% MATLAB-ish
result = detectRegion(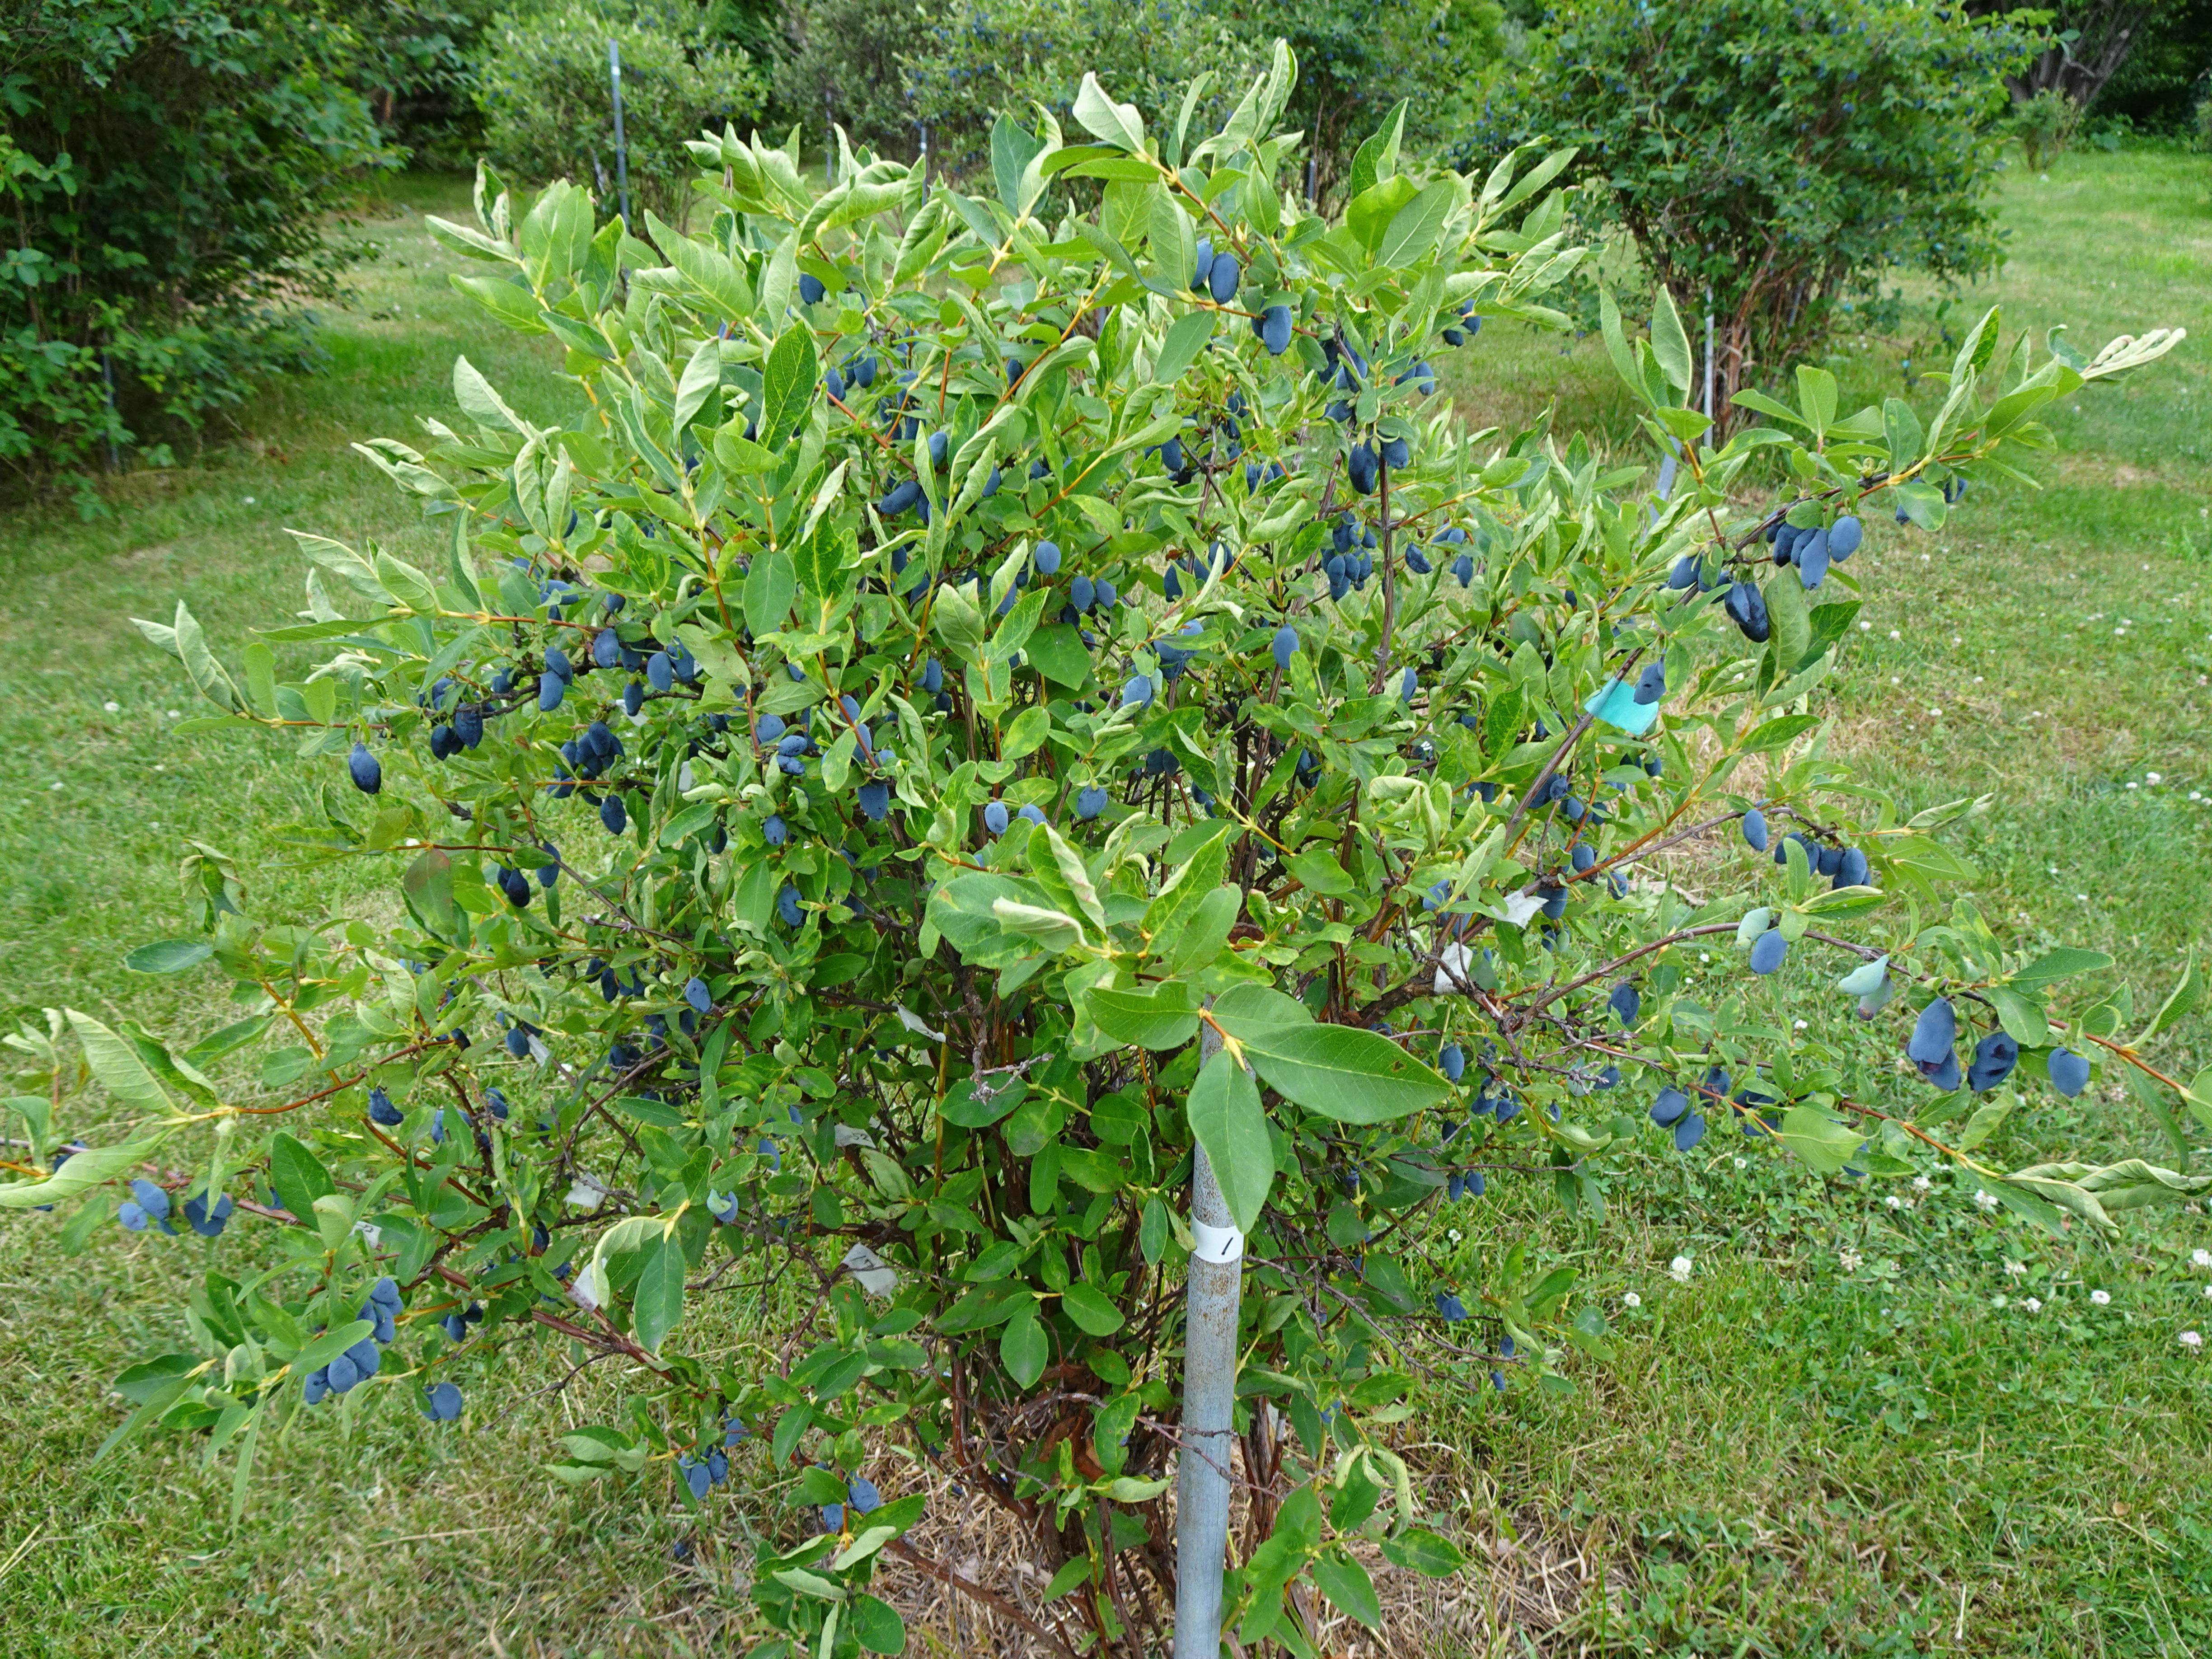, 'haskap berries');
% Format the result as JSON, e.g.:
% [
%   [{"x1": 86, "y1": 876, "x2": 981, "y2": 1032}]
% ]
[
  {"x1": 644, "y1": 1013, "x2": 664, "y2": 1026},
  {"x1": 1467, "y1": 780, "x2": 1499, "y2": 805},
  {"x1": 450, "y1": 728, "x2": 464, "y2": 755},
  {"x1": 966, "y1": 568, "x2": 981, "y2": 588},
  {"x1": 895, "y1": 339, "x2": 910, "y2": 362},
  {"x1": 1405, "y1": 543, "x2": 1432, "y2": 575},
  {"x1": 1234, "y1": 386, "x2": 1249, "y2": 417},
  {"x1": 595, "y1": 508, "x2": 612, "y2": 529},
  {"x1": 534, "y1": 566, "x2": 576, "y2": 584},
  {"x1": 1973, "y1": 1032, "x2": 2021, "y2": 1093},
  {"x1": 884, "y1": 712, "x2": 898, "y2": 725},
  {"x1": 455, "y1": 1304, "x2": 484, "y2": 1321},
  {"x1": 450, "y1": 980, "x2": 458, "y2": 985},
  {"x1": 683, "y1": 1459, "x2": 712, "y2": 1499},
  {"x1": 1544, "y1": 1101, "x2": 1562, "y2": 1127},
  {"x1": 858, "y1": 773, "x2": 889, "y2": 821},
  {"x1": 1565, "y1": 587, "x2": 1578, "y2": 608},
  {"x1": 843, "y1": 895, "x2": 872, "y2": 925},
  {"x1": 1015, "y1": 803, "x2": 1045, "y2": 828},
  {"x1": 600, "y1": 734, "x2": 625, "y2": 769},
  {"x1": 993, "y1": 583, "x2": 1021, "y2": 623},
  {"x1": 854, "y1": 355, "x2": 878, "y2": 391},
  {"x1": 68, "y1": 1142, "x2": 87, "y2": 1151},
  {"x1": 1527, "y1": 770, "x2": 1557, "y2": 809},
  {"x1": 538, "y1": 1121, "x2": 552, "y2": 1140},
  {"x1": 1210, "y1": 252, "x2": 1241, "y2": 302},
  {"x1": 346, "y1": 1338, "x2": 381, "y2": 1375},
  {"x1": 1540, "y1": 885, "x2": 1568, "y2": 923},
  {"x1": 874, "y1": 749, "x2": 896, "y2": 768},
  {"x1": 1036, "y1": 541, "x2": 1060, "y2": 575},
  {"x1": 1263, "y1": 303, "x2": 1291, "y2": 354},
  {"x1": 1828, "y1": 1117, "x2": 1841, "y2": 1125},
  {"x1": 744, "y1": 624, "x2": 756, "y2": 643},
  {"x1": 1530, "y1": 721, "x2": 1550, "y2": 744},
  {"x1": 430, "y1": 1111, "x2": 474, "y2": 1130},
  {"x1": 1567, "y1": 794, "x2": 1584, "y2": 818},
  {"x1": 709, "y1": 1454, "x2": 729, "y2": 1486},
  {"x1": 897, "y1": 371, "x2": 917, "y2": 387},
  {"x1": 134, "y1": 1178, "x2": 171, "y2": 1216},
  {"x1": 1603, "y1": 780, "x2": 1617, "y2": 789},
  {"x1": 685, "y1": 455, "x2": 699, "y2": 478},
  {"x1": 814, "y1": 1463, "x2": 827, "y2": 1471},
  {"x1": 1857, "y1": 982, "x2": 1898, "y2": 1020},
  {"x1": 1449, "y1": 1172, "x2": 1466, "y2": 1203},
  {"x1": 648, "y1": 527, "x2": 657, "y2": 538},
  {"x1": 772, "y1": 753, "x2": 807, "y2": 776},
  {"x1": 599, "y1": 795, "x2": 629, "y2": 836},
  {"x1": 1592, "y1": 804, "x2": 1606, "y2": 825},
  {"x1": 1616, "y1": 782, "x2": 1625, "y2": 791},
  {"x1": 493, "y1": 1254, "x2": 519, "y2": 1272},
  {"x1": 1327, "y1": 554, "x2": 1347, "y2": 586},
  {"x1": 913, "y1": 666, "x2": 925, "y2": 689},
  {"x1": 1794, "y1": 1090, "x2": 1816, "y2": 1104},
  {"x1": 1908, "y1": 1001, "x2": 1953, "y2": 1064},
  {"x1": 1667, "y1": 553, "x2": 1699, "y2": 592},
  {"x1": 1633, "y1": 755, "x2": 1641, "y2": 768},
  {"x1": 1381, "y1": 435, "x2": 1410, "y2": 471},
  {"x1": 539, "y1": 593, "x2": 562, "y2": 623},
  {"x1": 644, "y1": 1091, "x2": 661, "y2": 1103},
  {"x1": 1330, "y1": 575, "x2": 1351, "y2": 602},
  {"x1": 416, "y1": 1388, "x2": 441, "y2": 1422},
  {"x1": 589, "y1": 720, "x2": 611, "y2": 760},
  {"x1": 889, "y1": 543, "x2": 916, "y2": 576},
  {"x1": 1608, "y1": 984, "x2": 1640, "y2": 1025},
  {"x1": 635, "y1": 518, "x2": 651, "y2": 537},
  {"x1": 374, "y1": 1302, "x2": 396, "y2": 1341},
  {"x1": 1458, "y1": 298, "x2": 1481, "y2": 336},
  {"x1": 1155, "y1": 639, "x2": 1193, "y2": 674},
  {"x1": 804, "y1": 705, "x2": 825, "y2": 752},
  {"x1": 1336, "y1": 366, "x2": 1348, "y2": 390},
  {"x1": 1128, "y1": 766, "x2": 1143, "y2": 783},
  {"x1": 451, "y1": 705, "x2": 486, "y2": 751},
  {"x1": 1551, "y1": 847, "x2": 1564, "y2": 864},
  {"x1": 1748, "y1": 927, "x2": 1784, "y2": 973},
  {"x1": 1188, "y1": 449, "x2": 1205, "y2": 470},
  {"x1": 477, "y1": 1131, "x2": 492, "y2": 1154},
  {"x1": 120, "y1": 1201, "x2": 148, "y2": 1232},
  {"x1": 439, "y1": 1314, "x2": 448, "y2": 1327},
  {"x1": 674, "y1": 1541, "x2": 689, "y2": 1555},
  {"x1": 617, "y1": 636, "x2": 652, "y2": 668},
  {"x1": 1247, "y1": 465, "x2": 1258, "y2": 496},
  {"x1": 1634, "y1": 660, "x2": 1665, "y2": 705},
  {"x1": 1196, "y1": 558, "x2": 1213, "y2": 582},
  {"x1": 524, "y1": 1016, "x2": 543, "y2": 1037},
  {"x1": 1257, "y1": 461, "x2": 1274, "y2": 485},
  {"x1": 1547, "y1": 774, "x2": 1570, "y2": 802},
  {"x1": 977, "y1": 466, "x2": 1002, "y2": 496},
  {"x1": 29, "y1": 1204, "x2": 53, "y2": 1211},
  {"x1": 355, "y1": 1367, "x2": 367, "y2": 1383},
  {"x1": 1552, "y1": 711, "x2": 1565, "y2": 726},
  {"x1": 1080, "y1": 787, "x2": 1106, "y2": 821},
  {"x1": 355, "y1": 1297, "x2": 376, "y2": 1327},
  {"x1": 574, "y1": 732, "x2": 592, "y2": 764},
  {"x1": 1766, "y1": 520, "x2": 1794, "y2": 562},
  {"x1": 1191, "y1": 780, "x2": 1211, "y2": 805},
  {"x1": 430, "y1": 723, "x2": 464, "y2": 761},
  {"x1": 262, "y1": 1188, "x2": 286, "y2": 1209},
  {"x1": 399, "y1": 958, "x2": 412, "y2": 972},
  {"x1": 1740, "y1": 805, "x2": 1770, "y2": 854},
  {"x1": 1342, "y1": 337, "x2": 1367, "y2": 392},
  {"x1": 665, "y1": 636, "x2": 696, "y2": 682},
  {"x1": 2048, "y1": 1045, "x2": 2091, "y2": 1101},
  {"x1": 1200, "y1": 441, "x2": 1214, "y2": 461},
  {"x1": 366, "y1": 1089, "x2": 404, "y2": 1127},
  {"x1": 1833, "y1": 846, "x2": 1870, "y2": 891},
  {"x1": 838, "y1": 849, "x2": 854, "y2": 869},
  {"x1": 1120, "y1": 674, "x2": 1155, "y2": 712},
  {"x1": 1415, "y1": 359, "x2": 1438, "y2": 398},
  {"x1": 414, "y1": 962, "x2": 428, "y2": 974},
  {"x1": 787, "y1": 1104, "x2": 805, "y2": 1126},
  {"x1": 385, "y1": 1298, "x2": 406, "y2": 1314},
  {"x1": 161, "y1": 1222, "x2": 181, "y2": 1236},
  {"x1": 1222, "y1": 546, "x2": 1234, "y2": 573},
  {"x1": 1226, "y1": 395, "x2": 1237, "y2": 414},
  {"x1": 1457, "y1": 712, "x2": 1479, "y2": 734},
  {"x1": 822, "y1": 749, "x2": 831, "y2": 768},
  {"x1": 878, "y1": 397, "x2": 895, "y2": 422},
  {"x1": 1436, "y1": 1292, "x2": 1468, "y2": 1323},
  {"x1": 546, "y1": 768, "x2": 596, "y2": 799},
  {"x1": 1445, "y1": 1043, "x2": 1466, "y2": 1083},
  {"x1": 487, "y1": 1099, "x2": 508, "y2": 1119},
  {"x1": 1331, "y1": 512, "x2": 1358, "y2": 554},
  {"x1": 1161, "y1": 438, "x2": 1190, "y2": 478},
  {"x1": 649, "y1": 1022, "x2": 668, "y2": 1050},
  {"x1": 1227, "y1": 442, "x2": 1236, "y2": 453},
  {"x1": 303, "y1": 1368, "x2": 331, "y2": 1406},
  {"x1": 744, "y1": 422, "x2": 756, "y2": 443},
  {"x1": 1363, "y1": 528, "x2": 1376, "y2": 549},
  {"x1": 1355, "y1": 580, "x2": 1365, "y2": 592},
  {"x1": 1595, "y1": 1067, "x2": 1619, "y2": 1089},
  {"x1": 487, "y1": 1261, "x2": 498, "y2": 1272},
  {"x1": 1350, "y1": 442, "x2": 1379, "y2": 496},
  {"x1": 714, "y1": 1190, "x2": 738, "y2": 1224},
  {"x1": 688, "y1": 585, "x2": 706, "y2": 598},
  {"x1": 539, "y1": 955, "x2": 559, "y2": 980},
  {"x1": 879, "y1": 481, "x2": 920, "y2": 516},
  {"x1": 833, "y1": 353, "x2": 863, "y2": 387},
  {"x1": 438, "y1": 1034, "x2": 450, "y2": 1042},
  {"x1": 1541, "y1": 927, "x2": 1563, "y2": 955},
  {"x1": 755, "y1": 714, "x2": 786, "y2": 743},
  {"x1": 862, "y1": 867, "x2": 877, "y2": 884},
  {"x1": 1072, "y1": 576, "x2": 1094, "y2": 614},
  {"x1": 1694, "y1": 554, "x2": 1726, "y2": 593},
  {"x1": 430, "y1": 1111, "x2": 448, "y2": 1144},
  {"x1": 505, "y1": 1026, "x2": 530, "y2": 1059},
  {"x1": 1321, "y1": 548, "x2": 1334, "y2": 573},
  {"x1": 1644, "y1": 757, "x2": 1662, "y2": 776},
  {"x1": 1315, "y1": 337, "x2": 1338, "y2": 384},
  {"x1": 1033, "y1": 313, "x2": 1043, "y2": 346},
  {"x1": 1612, "y1": 615, "x2": 1636, "y2": 639},
  {"x1": 563, "y1": 510, "x2": 578, "y2": 538},
  {"x1": 765, "y1": 814, "x2": 787, "y2": 846},
  {"x1": 707, "y1": 820, "x2": 728, "y2": 854},
  {"x1": 604, "y1": 593, "x2": 626, "y2": 613},
  {"x1": 1843, "y1": 1142, "x2": 1871, "y2": 1175},
  {"x1": 1395, "y1": 667, "x2": 1418, "y2": 706},
  {"x1": 848, "y1": 722, "x2": 874, "y2": 760},
  {"x1": 1438, "y1": 526, "x2": 1466, "y2": 547},
  {"x1": 369, "y1": 1275, "x2": 399, "y2": 1305},
  {"x1": 761, "y1": 1115, "x2": 788, "y2": 1140},
  {"x1": 1321, "y1": 1397, "x2": 1342, "y2": 1424},
  {"x1": 1812, "y1": 841, "x2": 1844, "y2": 882},
  {"x1": 583, "y1": 958, "x2": 603, "y2": 983},
  {"x1": 618, "y1": 679, "x2": 645, "y2": 718},
  {"x1": 1732, "y1": 1085, "x2": 1767, "y2": 1118},
  {"x1": 825, "y1": 374, "x2": 848, "y2": 408},
  {"x1": 1295, "y1": 750, "x2": 1321, "y2": 789},
  {"x1": 441, "y1": 990, "x2": 454, "y2": 1012},
  {"x1": 797, "y1": 272, "x2": 826, "y2": 306},
  {"x1": 717, "y1": 323, "x2": 747, "y2": 369},
  {"x1": 540, "y1": 1294, "x2": 558, "y2": 1303},
  {"x1": 623, "y1": 778, "x2": 642, "y2": 788},
  {"x1": 821, "y1": 1504, "x2": 846, "y2": 1531},
  {"x1": 185, "y1": 1198, "x2": 227, "y2": 1236},
  {"x1": 1619, "y1": 752, "x2": 1633, "y2": 766},
  {"x1": 707, "y1": 1189, "x2": 733, "y2": 1213},
  {"x1": 54, "y1": 1156, "x2": 73, "y2": 1170},
  {"x1": 538, "y1": 580, "x2": 578, "y2": 605},
  {"x1": 938, "y1": 693, "x2": 952, "y2": 712},
  {"x1": 848, "y1": 1475, "x2": 882, "y2": 1516},
  {"x1": 1441, "y1": 326, "x2": 1466, "y2": 348},
  {"x1": 985, "y1": 803, "x2": 1007, "y2": 835},
  {"x1": 1835, "y1": 958, "x2": 1889, "y2": 999},
  {"x1": 1465, "y1": 1167, "x2": 1485, "y2": 1203},
  {"x1": 193, "y1": 1190, "x2": 234, "y2": 1215},
  {"x1": 1272, "y1": 624, "x2": 1300, "y2": 671},
  {"x1": 608, "y1": 1042, "x2": 638, "y2": 1070},
  {"x1": 645, "y1": 651, "x2": 675, "y2": 693},
  {"x1": 1736, "y1": 907, "x2": 1770, "y2": 950},
  {"x1": 1573, "y1": 845, "x2": 1594, "y2": 873},
  {"x1": 722, "y1": 1418, "x2": 742, "y2": 1449},
  {"x1": 776, "y1": 885, "x2": 806, "y2": 930},
  {"x1": 496, "y1": 1011, "x2": 505, "y2": 1024},
  {"x1": 724, "y1": 680, "x2": 751, "y2": 722},
  {"x1": 447, "y1": 1026, "x2": 472, "y2": 1050},
  {"x1": 1144, "y1": 434, "x2": 1182, "y2": 458},
  {"x1": 349, "y1": 743, "x2": 381, "y2": 794},
  {"x1": 1572, "y1": 831, "x2": 1588, "y2": 848},
  {"x1": 507, "y1": 867, "x2": 530, "y2": 907},
  {"x1": 1657, "y1": 1084, "x2": 1679, "y2": 1129},
  {"x1": 582, "y1": 791, "x2": 602, "y2": 807},
  {"x1": 444, "y1": 1312, "x2": 467, "y2": 1343},
  {"x1": 535, "y1": 840, "x2": 562, "y2": 886},
  {"x1": 484, "y1": 1088, "x2": 507, "y2": 1103},
  {"x1": 687, "y1": 977, "x2": 712, "y2": 1012},
  {"x1": 1193, "y1": 238, "x2": 1215, "y2": 286},
  {"x1": 623, "y1": 787, "x2": 650, "y2": 805},
  {"x1": 548, "y1": 1262, "x2": 572, "y2": 1281},
  {"x1": 784, "y1": 657, "x2": 807, "y2": 683},
  {"x1": 1500, "y1": 1334, "x2": 1517, "y2": 1358},
  {"x1": 591, "y1": 628, "x2": 623, "y2": 670},
  {"x1": 1162, "y1": 563, "x2": 1181, "y2": 600},
  {"x1": 1595, "y1": 850, "x2": 1610, "y2": 863},
  {"x1": 528, "y1": 1220, "x2": 549, "y2": 1258},
  {"x1": 1650, "y1": 1088, "x2": 1689, "y2": 1123},
  {"x1": 1798, "y1": 531, "x2": 1827, "y2": 591},
  {"x1": 1492, "y1": 1097, "x2": 1520, "y2": 1125},
  {"x1": 703, "y1": 712, "x2": 731, "y2": 738},
  {"x1": 1220, "y1": 421, "x2": 1239, "y2": 439},
  {"x1": 1931, "y1": 1049, "x2": 1962, "y2": 1089},
  {"x1": 514, "y1": 556, "x2": 539, "y2": 579},
  {"x1": 1395, "y1": 356, "x2": 1417, "y2": 388},
  {"x1": 1229, "y1": 443, "x2": 1243, "y2": 461},
  {"x1": 1560, "y1": 799, "x2": 1569, "y2": 813},
  {"x1": 928, "y1": 430, "x2": 951, "y2": 471},
  {"x1": 1493, "y1": 1370, "x2": 1507, "y2": 1393},
  {"x1": 928, "y1": 498, "x2": 949, "y2": 522},
  {"x1": 490, "y1": 665, "x2": 518, "y2": 694},
  {"x1": 1349, "y1": 521, "x2": 1366, "y2": 547},
  {"x1": 1158, "y1": 619, "x2": 1202, "y2": 653},
  {"x1": 679, "y1": 1010, "x2": 699, "y2": 1037},
  {"x1": 911, "y1": 578, "x2": 933, "y2": 609},
  {"x1": 629, "y1": 962, "x2": 647, "y2": 994},
  {"x1": 1606, "y1": 871, "x2": 1631, "y2": 900},
  {"x1": 583, "y1": 757, "x2": 603, "y2": 776},
  {"x1": 544, "y1": 646, "x2": 573, "y2": 685},
  {"x1": 1204, "y1": 801, "x2": 1218, "y2": 819},
  {"x1": 1294, "y1": 750, "x2": 1311, "y2": 774},
  {"x1": 1790, "y1": 523, "x2": 1816, "y2": 569},
  {"x1": 424, "y1": 1381, "x2": 464, "y2": 1423},
  {"x1": 1700, "y1": 1068, "x2": 1729, "y2": 1100},
  {"x1": 1673, "y1": 1114, "x2": 1705, "y2": 1151},
  {"x1": 1163, "y1": 749, "x2": 1181, "y2": 778},
  {"x1": 895, "y1": 388, "x2": 915, "y2": 408},
  {"x1": 1563, "y1": 850, "x2": 1572, "y2": 874},
  {"x1": 1578, "y1": 810, "x2": 1593, "y2": 826},
  {"x1": 1190, "y1": 413, "x2": 1199, "y2": 420},
  {"x1": 677, "y1": 1442, "x2": 710, "y2": 1470},
  {"x1": 1227, "y1": 418, "x2": 1236, "y2": 438},
  {"x1": 1727, "y1": 585, "x2": 1751, "y2": 621},
  {"x1": 1210, "y1": 541, "x2": 1226, "y2": 571},
  {"x1": 779, "y1": 1218, "x2": 789, "y2": 1228},
  {"x1": 1942, "y1": 475, "x2": 1967, "y2": 505},
  {"x1": 1030, "y1": 458, "x2": 1053, "y2": 481},
  {"x1": 754, "y1": 1136, "x2": 782, "y2": 1170},
  {"x1": 419, "y1": 692, "x2": 448, "y2": 726},
  {"x1": 1092, "y1": 577, "x2": 1117, "y2": 610},
  {"x1": 1472, "y1": 1086, "x2": 1497, "y2": 1116},
  {"x1": 1453, "y1": 554, "x2": 1475, "y2": 588},
  {"x1": 834, "y1": 694, "x2": 861, "y2": 722},
  {"x1": 1474, "y1": 947, "x2": 1493, "y2": 964},
  {"x1": 1369, "y1": 1023, "x2": 1393, "y2": 1035},
  {"x1": 1324, "y1": 397, "x2": 1354, "y2": 426},
  {"x1": 1270, "y1": 459, "x2": 1286, "y2": 479},
  {"x1": 777, "y1": 735, "x2": 808, "y2": 755},
  {"x1": 325, "y1": 1354, "x2": 359, "y2": 1393},
  {"x1": 1345, "y1": 553, "x2": 1360, "y2": 580},
  {"x1": 1161, "y1": 468, "x2": 1194, "y2": 493},
  {"x1": 1174, "y1": 556, "x2": 1192, "y2": 587},
  {"x1": 619, "y1": 980, "x2": 632, "y2": 995},
  {"x1": 885, "y1": 422, "x2": 902, "y2": 443},
  {"x1": 1252, "y1": 298, "x2": 1266, "y2": 339},
  {"x1": 539, "y1": 670, "x2": 564, "y2": 712},
  {"x1": 553, "y1": 741, "x2": 578, "y2": 778},
  {"x1": 1743, "y1": 1105, "x2": 1780, "y2": 1137},
  {"x1": 1428, "y1": 521, "x2": 1453, "y2": 543},
  {"x1": 918, "y1": 490, "x2": 931, "y2": 522},
  {"x1": 1829, "y1": 517, "x2": 1862, "y2": 565},
  {"x1": 1008, "y1": 360, "x2": 1022, "y2": 391},
  {"x1": 497, "y1": 861, "x2": 513, "y2": 895},
  {"x1": 1008, "y1": 649, "x2": 1020, "y2": 670},
  {"x1": 1143, "y1": 747, "x2": 1163, "y2": 776},
  {"x1": 1449, "y1": 555, "x2": 1473, "y2": 574},
  {"x1": 1352, "y1": 547, "x2": 1371, "y2": 580},
  {"x1": 598, "y1": 970, "x2": 624, "y2": 1003},
  {"x1": 1422, "y1": 881, "x2": 1454, "y2": 910},
  {"x1": 497, "y1": 1189, "x2": 511, "y2": 1206},
  {"x1": 903, "y1": 406, "x2": 928, "y2": 440},
  {"x1": 430, "y1": 679, "x2": 455, "y2": 709},
  {"x1": 902, "y1": 327, "x2": 921, "y2": 347},
  {"x1": 921, "y1": 658, "x2": 945, "y2": 698},
  {"x1": 664, "y1": 1089, "x2": 685, "y2": 1107},
  {"x1": 1411, "y1": 745, "x2": 1425, "y2": 760}
]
